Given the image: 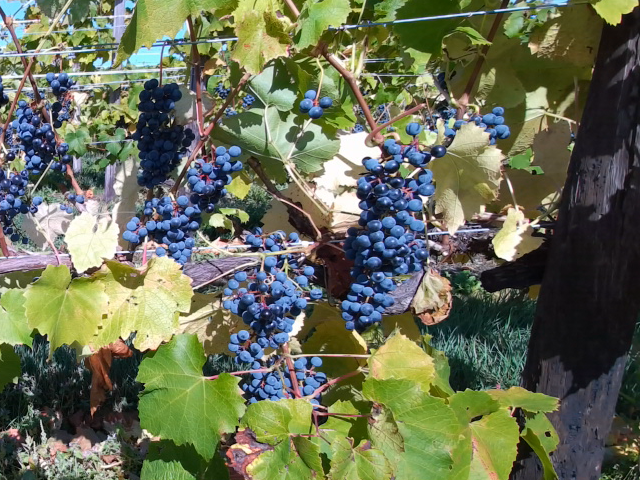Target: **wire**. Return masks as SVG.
<instances>
[{
    "label": "wire",
    "instance_id": "wire-4",
    "mask_svg": "<svg viewBox=\"0 0 640 480\" xmlns=\"http://www.w3.org/2000/svg\"><path fill=\"white\" fill-rule=\"evenodd\" d=\"M62 257H70L69 253L59 254H39V255H1L0 261L3 260H41V259H57Z\"/></svg>",
    "mask_w": 640,
    "mask_h": 480
},
{
    "label": "wire",
    "instance_id": "wire-3",
    "mask_svg": "<svg viewBox=\"0 0 640 480\" xmlns=\"http://www.w3.org/2000/svg\"><path fill=\"white\" fill-rule=\"evenodd\" d=\"M238 40L237 36L228 37V38H219V39H194L183 42H171L165 44H154V49H168L173 47H186L196 44H221V43H230L236 42Z\"/></svg>",
    "mask_w": 640,
    "mask_h": 480
},
{
    "label": "wire",
    "instance_id": "wire-1",
    "mask_svg": "<svg viewBox=\"0 0 640 480\" xmlns=\"http://www.w3.org/2000/svg\"><path fill=\"white\" fill-rule=\"evenodd\" d=\"M568 2H557V3H542V4H534L528 6H520V7H504L493 10H476V11H468L461 13H445V14H433L421 17H412L407 19H392V20H376L367 23H345L340 25H328V30H342L347 28H369L378 25H394V24H409L414 22H427L435 19H448V18H464L470 16H479V15H496L500 13L506 12H522V11H530L536 9H544V8H559V7H568Z\"/></svg>",
    "mask_w": 640,
    "mask_h": 480
},
{
    "label": "wire",
    "instance_id": "wire-5",
    "mask_svg": "<svg viewBox=\"0 0 640 480\" xmlns=\"http://www.w3.org/2000/svg\"><path fill=\"white\" fill-rule=\"evenodd\" d=\"M494 229L493 225H489V226H480L477 228H473V229H463V230H457L456 234L457 235H465V234H475V233H479L482 231H491Z\"/></svg>",
    "mask_w": 640,
    "mask_h": 480
},
{
    "label": "wire",
    "instance_id": "wire-2",
    "mask_svg": "<svg viewBox=\"0 0 640 480\" xmlns=\"http://www.w3.org/2000/svg\"><path fill=\"white\" fill-rule=\"evenodd\" d=\"M118 46H106V47H96V48H82L76 50H63V51H50V52H42V53H9V54H0V59H12V58H44V57H52V56H65V55H78L85 53H98V52H108V51H118Z\"/></svg>",
    "mask_w": 640,
    "mask_h": 480
}]
</instances>
